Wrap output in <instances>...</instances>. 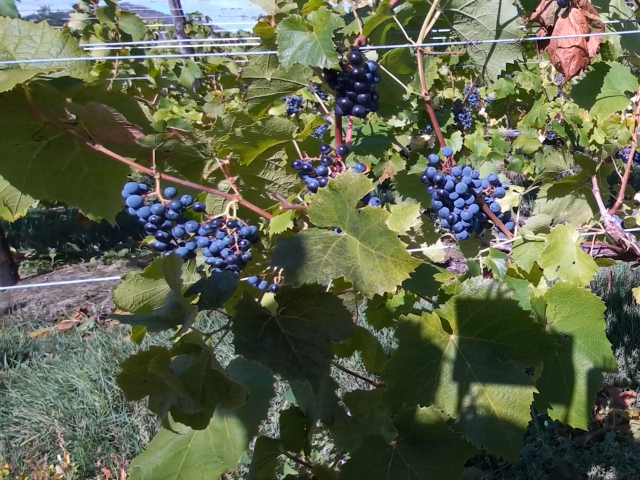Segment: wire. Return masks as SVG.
<instances>
[{"label": "wire", "instance_id": "wire-3", "mask_svg": "<svg viewBox=\"0 0 640 480\" xmlns=\"http://www.w3.org/2000/svg\"><path fill=\"white\" fill-rule=\"evenodd\" d=\"M122 280H123L122 276H102V277H97L95 279H83V280H52V281L42 282V283L1 285L0 291L19 290V289H26V288H44V287H50L54 285H86V284H97L99 282H104V281H122Z\"/></svg>", "mask_w": 640, "mask_h": 480}, {"label": "wire", "instance_id": "wire-4", "mask_svg": "<svg viewBox=\"0 0 640 480\" xmlns=\"http://www.w3.org/2000/svg\"><path fill=\"white\" fill-rule=\"evenodd\" d=\"M456 245L455 244H449V245H440V246H432V247H414V248H408L407 252L408 253H417V252H434V251H443V250H452L455 249Z\"/></svg>", "mask_w": 640, "mask_h": 480}, {"label": "wire", "instance_id": "wire-1", "mask_svg": "<svg viewBox=\"0 0 640 480\" xmlns=\"http://www.w3.org/2000/svg\"><path fill=\"white\" fill-rule=\"evenodd\" d=\"M640 34V29L632 31H610V32H586L577 34H552L548 36L537 37H510V38H495V39H479V40H467L456 42H429V43H415V44H386L380 46H353V51H382L389 49H417V48H431V47H458L469 45H482L497 43H512V42H539L550 41L554 39H579L589 37H613V36H634Z\"/></svg>", "mask_w": 640, "mask_h": 480}, {"label": "wire", "instance_id": "wire-2", "mask_svg": "<svg viewBox=\"0 0 640 480\" xmlns=\"http://www.w3.org/2000/svg\"><path fill=\"white\" fill-rule=\"evenodd\" d=\"M276 50L270 51H254L246 50L239 52H218V53H191V52H175V53H156V54H119V55H86V56H73V57H61V58H40L33 57L30 59L17 58L12 60H0V65H15V64H33L38 63H63V62H75V61H110V60H122V59H158V58H177V57H189V58H220V57H241V56H272L276 55Z\"/></svg>", "mask_w": 640, "mask_h": 480}]
</instances>
